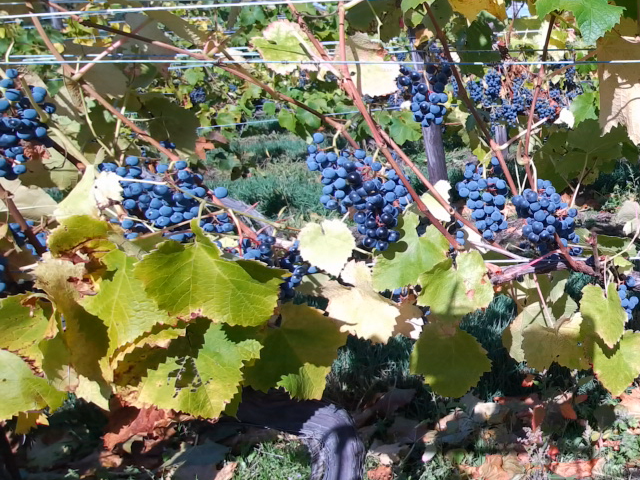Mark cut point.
Masks as SVG:
<instances>
[{
  "instance_id": "obj_1",
  "label": "cut point",
  "mask_w": 640,
  "mask_h": 480,
  "mask_svg": "<svg viewBox=\"0 0 640 480\" xmlns=\"http://www.w3.org/2000/svg\"><path fill=\"white\" fill-rule=\"evenodd\" d=\"M495 153L494 150H492L491 148L486 152L485 158L482 162V172L486 173L487 172V164L489 163L490 157L491 155Z\"/></svg>"
}]
</instances>
